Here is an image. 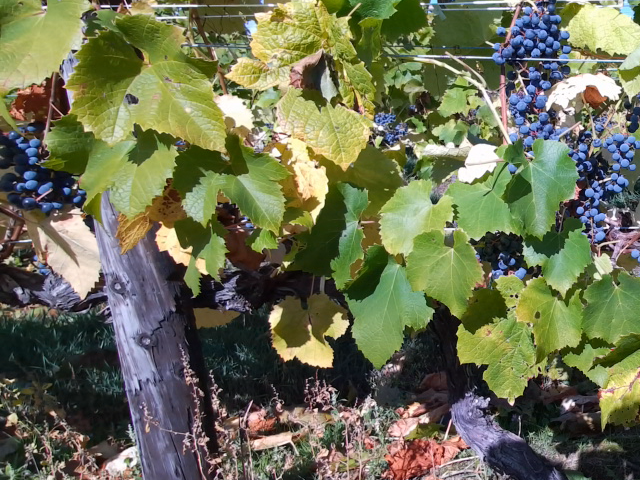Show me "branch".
<instances>
[{"label":"branch","instance_id":"branch-1","mask_svg":"<svg viewBox=\"0 0 640 480\" xmlns=\"http://www.w3.org/2000/svg\"><path fill=\"white\" fill-rule=\"evenodd\" d=\"M506 66L502 65L500 67V77H499V94L501 95V127L505 132L509 131L508 125V112H507V100H506Z\"/></svg>","mask_w":640,"mask_h":480},{"label":"branch","instance_id":"branch-2","mask_svg":"<svg viewBox=\"0 0 640 480\" xmlns=\"http://www.w3.org/2000/svg\"><path fill=\"white\" fill-rule=\"evenodd\" d=\"M58 77V72L54 71L51 77V85H50V109L49 114L46 120L45 130L47 134L51 133V123L54 116L55 111V87H56V79Z\"/></svg>","mask_w":640,"mask_h":480},{"label":"branch","instance_id":"branch-3","mask_svg":"<svg viewBox=\"0 0 640 480\" xmlns=\"http://www.w3.org/2000/svg\"><path fill=\"white\" fill-rule=\"evenodd\" d=\"M523 2H524V0H518L516 11H515L514 15L512 16V19L509 22L507 30H506V38L500 43V47L501 48H504L511 40V27L514 25V20L518 19V17L520 16Z\"/></svg>","mask_w":640,"mask_h":480},{"label":"branch","instance_id":"branch-4","mask_svg":"<svg viewBox=\"0 0 640 480\" xmlns=\"http://www.w3.org/2000/svg\"><path fill=\"white\" fill-rule=\"evenodd\" d=\"M193 17L195 18V22L198 25L199 32L202 38L205 41V44H211L210 38L207 36L206 31L204 30L203 23L198 19V11L197 9H192Z\"/></svg>","mask_w":640,"mask_h":480},{"label":"branch","instance_id":"branch-5","mask_svg":"<svg viewBox=\"0 0 640 480\" xmlns=\"http://www.w3.org/2000/svg\"><path fill=\"white\" fill-rule=\"evenodd\" d=\"M23 224H24V220L20 219L19 222L16 224L14 234L11 235L12 240H16L19 237L20 230Z\"/></svg>","mask_w":640,"mask_h":480}]
</instances>
